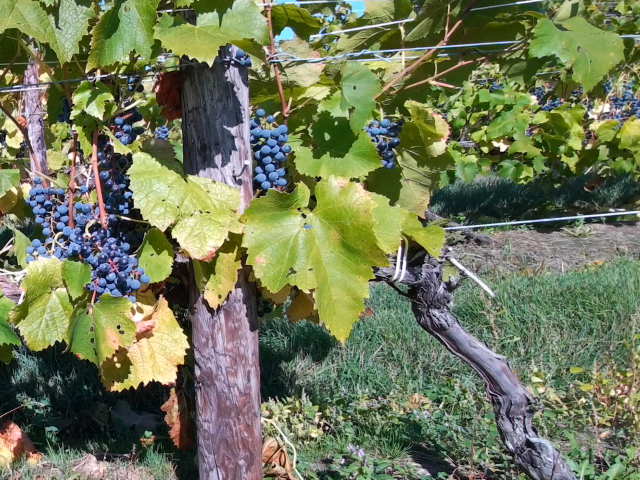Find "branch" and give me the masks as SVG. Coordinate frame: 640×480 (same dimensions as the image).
<instances>
[{
	"label": "branch",
	"mask_w": 640,
	"mask_h": 480,
	"mask_svg": "<svg viewBox=\"0 0 640 480\" xmlns=\"http://www.w3.org/2000/svg\"><path fill=\"white\" fill-rule=\"evenodd\" d=\"M98 127L99 124L95 123L93 125V129H92V137H93V156H92V164H93V175H94V182L96 185V195L98 198V207H99V211L101 214V219H100V225L101 226H105L107 224L106 221V211L104 209V205H103V196H102V192H101V182L99 179V172H98Z\"/></svg>",
	"instance_id": "1"
},
{
	"label": "branch",
	"mask_w": 640,
	"mask_h": 480,
	"mask_svg": "<svg viewBox=\"0 0 640 480\" xmlns=\"http://www.w3.org/2000/svg\"><path fill=\"white\" fill-rule=\"evenodd\" d=\"M77 146H78V132L74 131L73 132V144L71 147V160H70V169H69V174H70V181H69V187H68V207H67V212L69 214V219H68V225L71 228L75 227V223H74V211H73V199H74V192L76 190V185L75 183V169H76V150H77Z\"/></svg>",
	"instance_id": "2"
},
{
	"label": "branch",
	"mask_w": 640,
	"mask_h": 480,
	"mask_svg": "<svg viewBox=\"0 0 640 480\" xmlns=\"http://www.w3.org/2000/svg\"><path fill=\"white\" fill-rule=\"evenodd\" d=\"M0 109L2 111H4V113L11 119V121L20 129V131L23 133V141H24V145L25 147L28 149L32 159H33V163H34V167L35 170L37 172H41L42 168L39 165V160L38 157L36 155L35 150L33 149L32 145L29 143V139H28V132L27 129L24 127V125L18 121V119L14 116V114L3 104L0 103Z\"/></svg>",
	"instance_id": "3"
},
{
	"label": "branch",
	"mask_w": 640,
	"mask_h": 480,
	"mask_svg": "<svg viewBox=\"0 0 640 480\" xmlns=\"http://www.w3.org/2000/svg\"><path fill=\"white\" fill-rule=\"evenodd\" d=\"M486 59H487V56H483V57H480L478 59H469L467 61L462 62L461 64H457L456 66H453V67H450L448 69H445V70L439 72L438 74H436L434 76H431L429 78L422 79V80L410 83V84H408V85H406V86H404V87H402L400 89L389 91V92H387V96H390V95H392L394 93H399V92L405 91L406 89H409L412 86H415V85H418V84H421V83H425V82H428V81H432L433 79H436V78L440 77L441 75H444L447 72H450V71H453L455 69H458L459 67H463L466 64H469L471 62H480V61H483V60H486Z\"/></svg>",
	"instance_id": "4"
},
{
	"label": "branch",
	"mask_w": 640,
	"mask_h": 480,
	"mask_svg": "<svg viewBox=\"0 0 640 480\" xmlns=\"http://www.w3.org/2000/svg\"><path fill=\"white\" fill-rule=\"evenodd\" d=\"M272 71H273V77L275 78L277 89H278V92H279V95H280V101L282 102V106H281L282 123L284 125H287L288 124L287 97H286V95L284 93V89L282 87L280 76L278 74L277 63H272Z\"/></svg>",
	"instance_id": "5"
},
{
	"label": "branch",
	"mask_w": 640,
	"mask_h": 480,
	"mask_svg": "<svg viewBox=\"0 0 640 480\" xmlns=\"http://www.w3.org/2000/svg\"><path fill=\"white\" fill-rule=\"evenodd\" d=\"M434 52H435V49H431L429 52L425 53L423 56H421L420 58L416 59L403 73L399 74L394 80H392L391 83H389L387 87H385L379 93H377L374 96V100H377L384 92L389 90L395 83H397L400 80L401 77L407 75L410 71H412V69L415 66H417L418 64L423 62L425 58H427L428 56H430Z\"/></svg>",
	"instance_id": "6"
},
{
	"label": "branch",
	"mask_w": 640,
	"mask_h": 480,
	"mask_svg": "<svg viewBox=\"0 0 640 480\" xmlns=\"http://www.w3.org/2000/svg\"><path fill=\"white\" fill-rule=\"evenodd\" d=\"M477 2H478V0H474L473 2H471V4H469V6L465 9V11L462 13V15L454 22V24L452 25L448 35L443 40H441L438 44H444L445 42H447L451 38L456 26L463 20V18L466 16V14L469 12V10H471V8Z\"/></svg>",
	"instance_id": "7"
},
{
	"label": "branch",
	"mask_w": 640,
	"mask_h": 480,
	"mask_svg": "<svg viewBox=\"0 0 640 480\" xmlns=\"http://www.w3.org/2000/svg\"><path fill=\"white\" fill-rule=\"evenodd\" d=\"M271 12L272 9L271 8H267L266 9V18H267V22L270 28V41H271V58H276V43L274 42V38H273V20H272V16H271Z\"/></svg>",
	"instance_id": "8"
}]
</instances>
